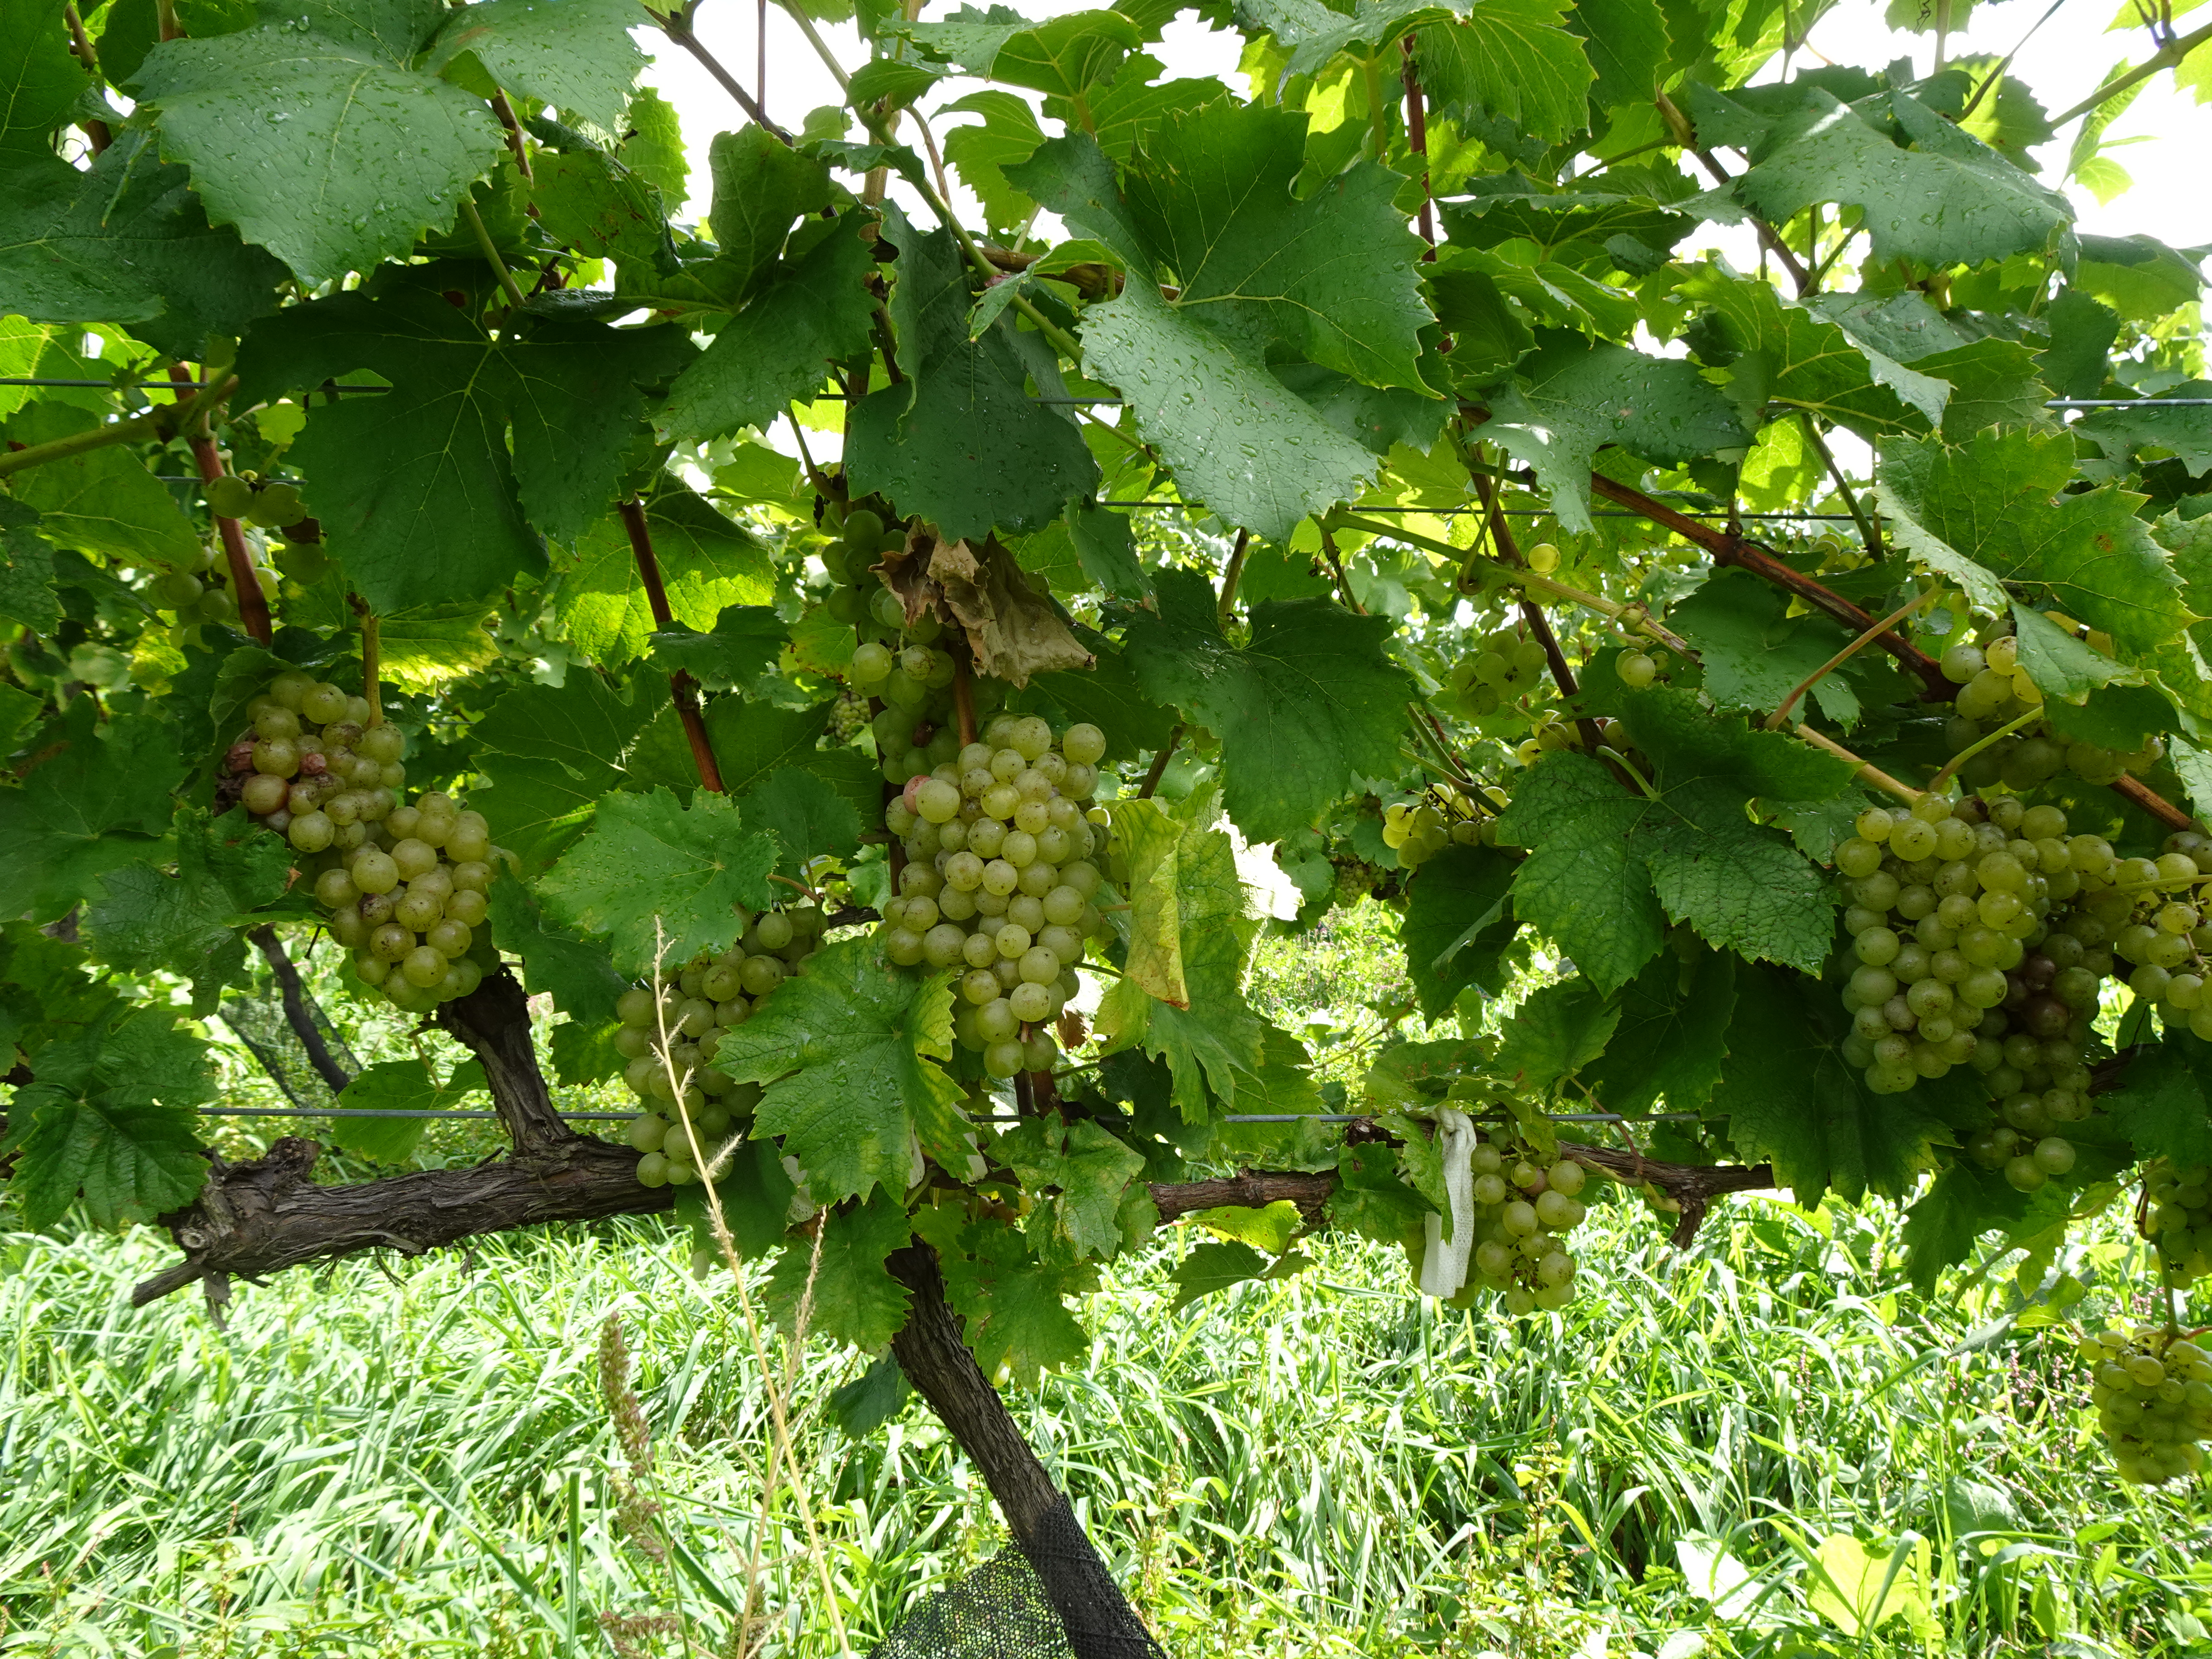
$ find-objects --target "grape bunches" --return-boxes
[1399,1221,1486,1311]
[315,790,521,1014]
[1450,630,1548,717]
[148,522,278,655]
[1941,609,2163,790]
[2143,1154,2212,1287]
[1526,544,1562,604]
[1970,911,2113,1192]
[2086,831,2212,1042]
[813,461,987,786]
[2077,1326,2212,1483]
[226,668,406,853]
[1382,783,1513,879]
[205,476,329,586]
[1833,790,2117,1093]
[612,906,829,1187]
[1516,709,1654,776]
[1616,646,1670,687]
[882,712,1118,1077]
[1471,1126,1586,1316]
